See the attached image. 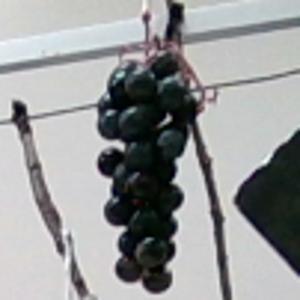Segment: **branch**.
I'll use <instances>...</instances> for the list:
<instances>
[{"mask_svg": "<svg viewBox=\"0 0 300 300\" xmlns=\"http://www.w3.org/2000/svg\"><path fill=\"white\" fill-rule=\"evenodd\" d=\"M11 122L19 134V140L28 173L29 184L36 207L41 212L49 234L56 246V254L63 258L68 269V277L78 300H99L89 291L88 285L77 266L74 250L65 234L63 221L52 203L51 194L42 170V163L33 141V129L30 123L28 105L20 99L11 100Z\"/></svg>", "mask_w": 300, "mask_h": 300, "instance_id": "1", "label": "branch"}, {"mask_svg": "<svg viewBox=\"0 0 300 300\" xmlns=\"http://www.w3.org/2000/svg\"><path fill=\"white\" fill-rule=\"evenodd\" d=\"M189 129L195 146V156L198 160V169L200 170L204 180L208 210L212 220V230L219 274V290L222 295V300H233V286L231 285L230 277V258L227 253L224 230L226 216L223 214L215 182L214 158L210 156L208 148L206 147L200 130V121L198 116L194 124L191 125Z\"/></svg>", "mask_w": 300, "mask_h": 300, "instance_id": "2", "label": "branch"}, {"mask_svg": "<svg viewBox=\"0 0 300 300\" xmlns=\"http://www.w3.org/2000/svg\"><path fill=\"white\" fill-rule=\"evenodd\" d=\"M167 10V23L165 26L162 43H169L176 47L181 56V71L184 75L183 87L188 93L193 96L190 91L191 83L189 79V72L186 66L184 55L181 51V36L183 32V25H185V3L177 2L175 0H164Z\"/></svg>", "mask_w": 300, "mask_h": 300, "instance_id": "3", "label": "branch"}]
</instances>
